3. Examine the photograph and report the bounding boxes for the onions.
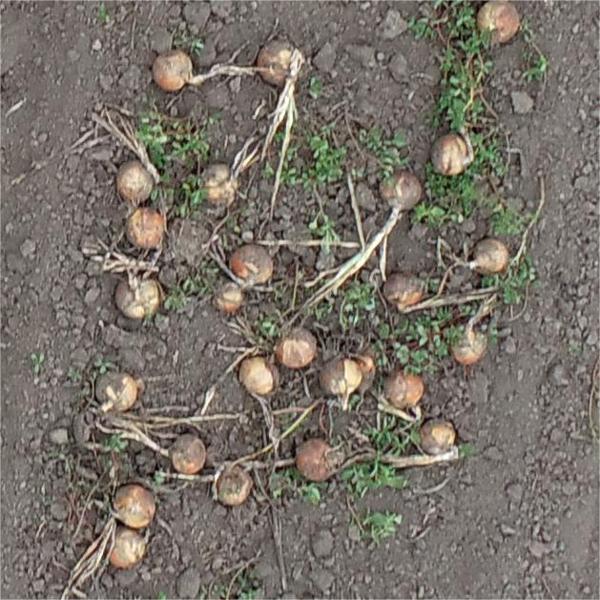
[114,274,160,318]
[216,283,243,311]
[214,463,251,506]
[125,208,164,247]
[197,161,234,206]
[381,369,422,407]
[111,482,154,526]
[152,50,190,90]
[293,437,334,480]
[431,131,470,174]
[99,372,139,409]
[316,359,362,397]
[383,170,421,206]
[255,39,297,81]
[418,417,454,453]
[114,162,152,201]
[274,329,315,368]
[385,272,424,310]
[477,4,518,43]
[448,319,486,362]
[106,526,146,566]
[167,432,206,473]
[228,242,271,282]
[236,355,275,394]
[470,237,508,274]
[351,351,375,392]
